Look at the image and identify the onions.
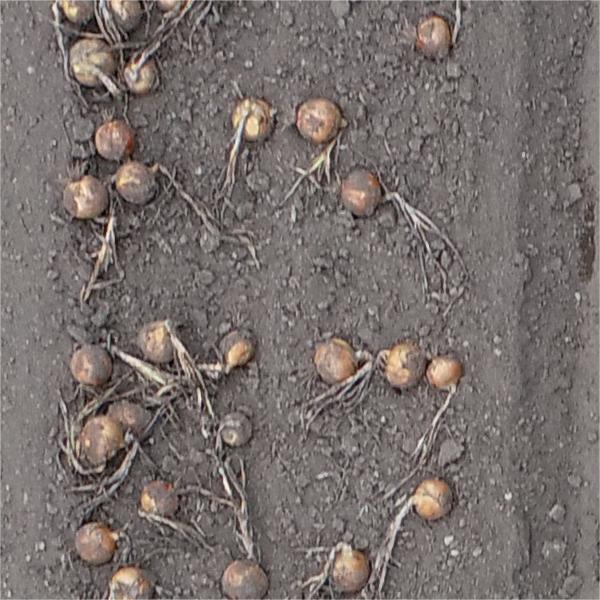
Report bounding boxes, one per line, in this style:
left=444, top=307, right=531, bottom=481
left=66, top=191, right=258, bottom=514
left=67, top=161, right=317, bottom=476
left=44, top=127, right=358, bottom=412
left=136, top=478, right=174, bottom=516
left=109, top=564, right=155, bottom=597
left=294, top=97, right=339, bottom=140
left=219, top=332, right=254, bottom=365
left=65, top=175, right=106, bottom=216
left=216, top=410, right=251, bottom=448
left=328, top=544, right=369, bottom=589
left=137, top=319, right=173, bottom=361
left=156, top=0, right=185, bottom=8
left=408, top=476, right=451, bottom=518
left=110, top=398, right=146, bottom=435
left=382, top=341, right=422, bottom=386
left=55, top=0, right=93, bottom=24
left=92, top=119, right=134, bottom=159
left=100, top=1, right=151, bottom=37
left=412, top=15, right=452, bottom=57
left=313, top=339, right=354, bottom=382
left=73, top=521, right=116, bottom=563
left=121, top=55, right=155, bottom=92
left=219, top=558, right=267, bottom=597
left=75, top=414, right=124, bottom=466
left=337, top=168, right=381, bottom=215
left=70, top=37, right=116, bottom=87
left=425, top=354, right=461, bottom=387
left=69, top=344, right=111, bottom=385
left=230, top=98, right=274, bottom=140
left=113, top=160, right=155, bottom=204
